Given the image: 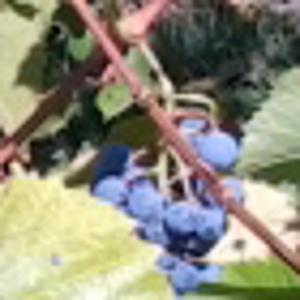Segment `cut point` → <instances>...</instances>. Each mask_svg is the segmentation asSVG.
<instances>
[{
  "label": "cut point",
  "instance_id": "cut-point-1",
  "mask_svg": "<svg viewBox=\"0 0 300 300\" xmlns=\"http://www.w3.org/2000/svg\"><path fill=\"white\" fill-rule=\"evenodd\" d=\"M137 48L149 59V62L156 73V77L164 88V110L166 112H171L173 110V102L198 104L207 109H213L215 107V102L203 95L173 93V84L165 72L158 54L150 48L145 41H139L137 43Z\"/></svg>",
  "mask_w": 300,
  "mask_h": 300
}]
</instances>
